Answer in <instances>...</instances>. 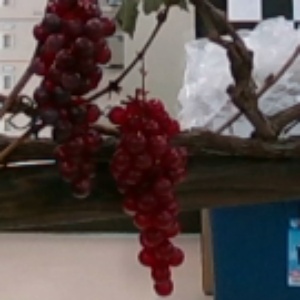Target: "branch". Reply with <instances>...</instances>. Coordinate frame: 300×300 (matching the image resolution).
Instances as JSON below:
<instances>
[{"label": "branch", "mask_w": 300, "mask_h": 300, "mask_svg": "<svg viewBox=\"0 0 300 300\" xmlns=\"http://www.w3.org/2000/svg\"><path fill=\"white\" fill-rule=\"evenodd\" d=\"M172 2L168 1L165 9H162L158 12V15L155 16V19L157 20L156 27L148 37L146 43L144 44L143 48L138 52L137 56L129 63L128 67L116 78L114 79L107 87H105L103 90L96 92L89 98H86L89 103L91 104L93 101H95L97 98L104 96L109 91L114 89L134 68V66L139 62L140 56H145L146 52L148 51L150 45L152 44L154 38L159 33L162 24L166 21L167 15L169 11L171 10Z\"/></svg>", "instance_id": "branch-1"}, {"label": "branch", "mask_w": 300, "mask_h": 300, "mask_svg": "<svg viewBox=\"0 0 300 300\" xmlns=\"http://www.w3.org/2000/svg\"><path fill=\"white\" fill-rule=\"evenodd\" d=\"M40 47V41L37 42V46L35 48L33 57L31 58L29 64L27 65L26 70L23 72L19 80L16 82L15 86L12 88L8 97L5 101L0 105V117L4 115L6 110L16 101V99L20 96L23 91L25 85L29 82V80L34 76V71L32 69V62L37 57V50Z\"/></svg>", "instance_id": "branch-2"}, {"label": "branch", "mask_w": 300, "mask_h": 300, "mask_svg": "<svg viewBox=\"0 0 300 300\" xmlns=\"http://www.w3.org/2000/svg\"><path fill=\"white\" fill-rule=\"evenodd\" d=\"M47 125L40 122L27 131L21 133L16 139H14L9 145L0 151V161H2L16 146L25 138L37 133L39 130L43 129Z\"/></svg>", "instance_id": "branch-3"}]
</instances>
